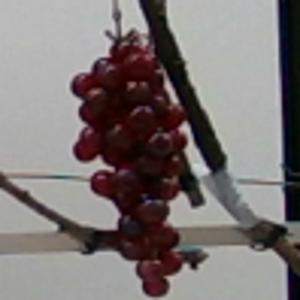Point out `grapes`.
<instances>
[{"label": "grapes", "instance_id": "grapes-1", "mask_svg": "<svg viewBox=\"0 0 300 300\" xmlns=\"http://www.w3.org/2000/svg\"><path fill=\"white\" fill-rule=\"evenodd\" d=\"M109 56L94 60L91 73L75 75L69 84L82 101L78 116L86 126L72 148L76 162L89 165L98 155L114 171L100 168L90 178L94 195L113 201L120 219L117 251L137 261L135 272L145 296L160 299L170 289L183 258L176 249L181 235L167 221L181 192L180 154L187 138L182 104L171 101L161 60L145 45L129 39L112 43Z\"/></svg>", "mask_w": 300, "mask_h": 300}]
</instances>
